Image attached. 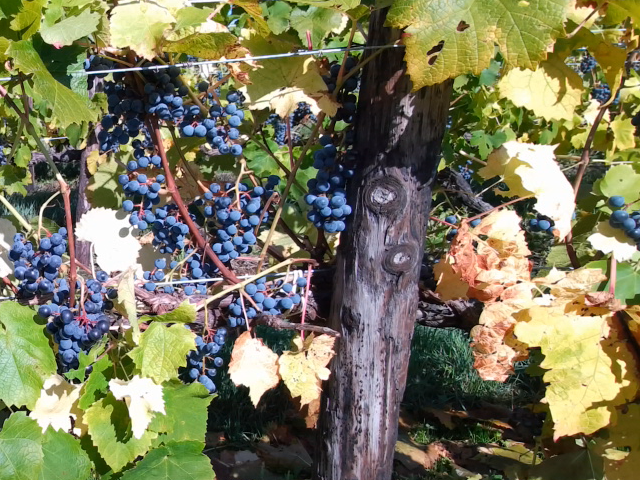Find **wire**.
<instances>
[{
    "mask_svg": "<svg viewBox=\"0 0 640 480\" xmlns=\"http://www.w3.org/2000/svg\"><path fill=\"white\" fill-rule=\"evenodd\" d=\"M403 44H385V45H363L353 48H334L323 50H307L292 53H271L266 56H246V57H234L216 60H199V61H187L184 63H178V68H186L189 66H202V65H219L237 62L248 61H270L274 58H295L309 55H325V54H337V53H355L365 50H387V49H403Z\"/></svg>",
    "mask_w": 640,
    "mask_h": 480,
    "instance_id": "obj_1",
    "label": "wire"
},
{
    "mask_svg": "<svg viewBox=\"0 0 640 480\" xmlns=\"http://www.w3.org/2000/svg\"><path fill=\"white\" fill-rule=\"evenodd\" d=\"M226 277H214V278H206V277H194L191 279H179V280H155V285H181V284H193L197 282L204 283H216V282H226Z\"/></svg>",
    "mask_w": 640,
    "mask_h": 480,
    "instance_id": "obj_2",
    "label": "wire"
},
{
    "mask_svg": "<svg viewBox=\"0 0 640 480\" xmlns=\"http://www.w3.org/2000/svg\"><path fill=\"white\" fill-rule=\"evenodd\" d=\"M166 68H167V65L163 64V65H157L155 68H151V67L144 68L143 66H140V67H128L125 69H108L105 71H88L87 70L86 74L88 76L90 75L96 76L97 73L112 74L113 72H117L118 74H127L130 72H142L143 70H149V71L165 70Z\"/></svg>",
    "mask_w": 640,
    "mask_h": 480,
    "instance_id": "obj_3",
    "label": "wire"
}]
</instances>
